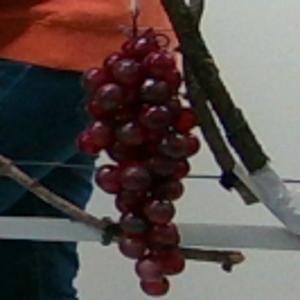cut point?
<instances>
[{"label":"cut point","mask_w":300,"mask_h":300,"mask_svg":"<svg viewBox=\"0 0 300 300\" xmlns=\"http://www.w3.org/2000/svg\"><path fill=\"white\" fill-rule=\"evenodd\" d=\"M141 14V11L139 10L138 7V2L137 0H130V5H129V17L132 21V36L137 37L138 34V18Z\"/></svg>","instance_id":"6a23745f"}]
</instances>
